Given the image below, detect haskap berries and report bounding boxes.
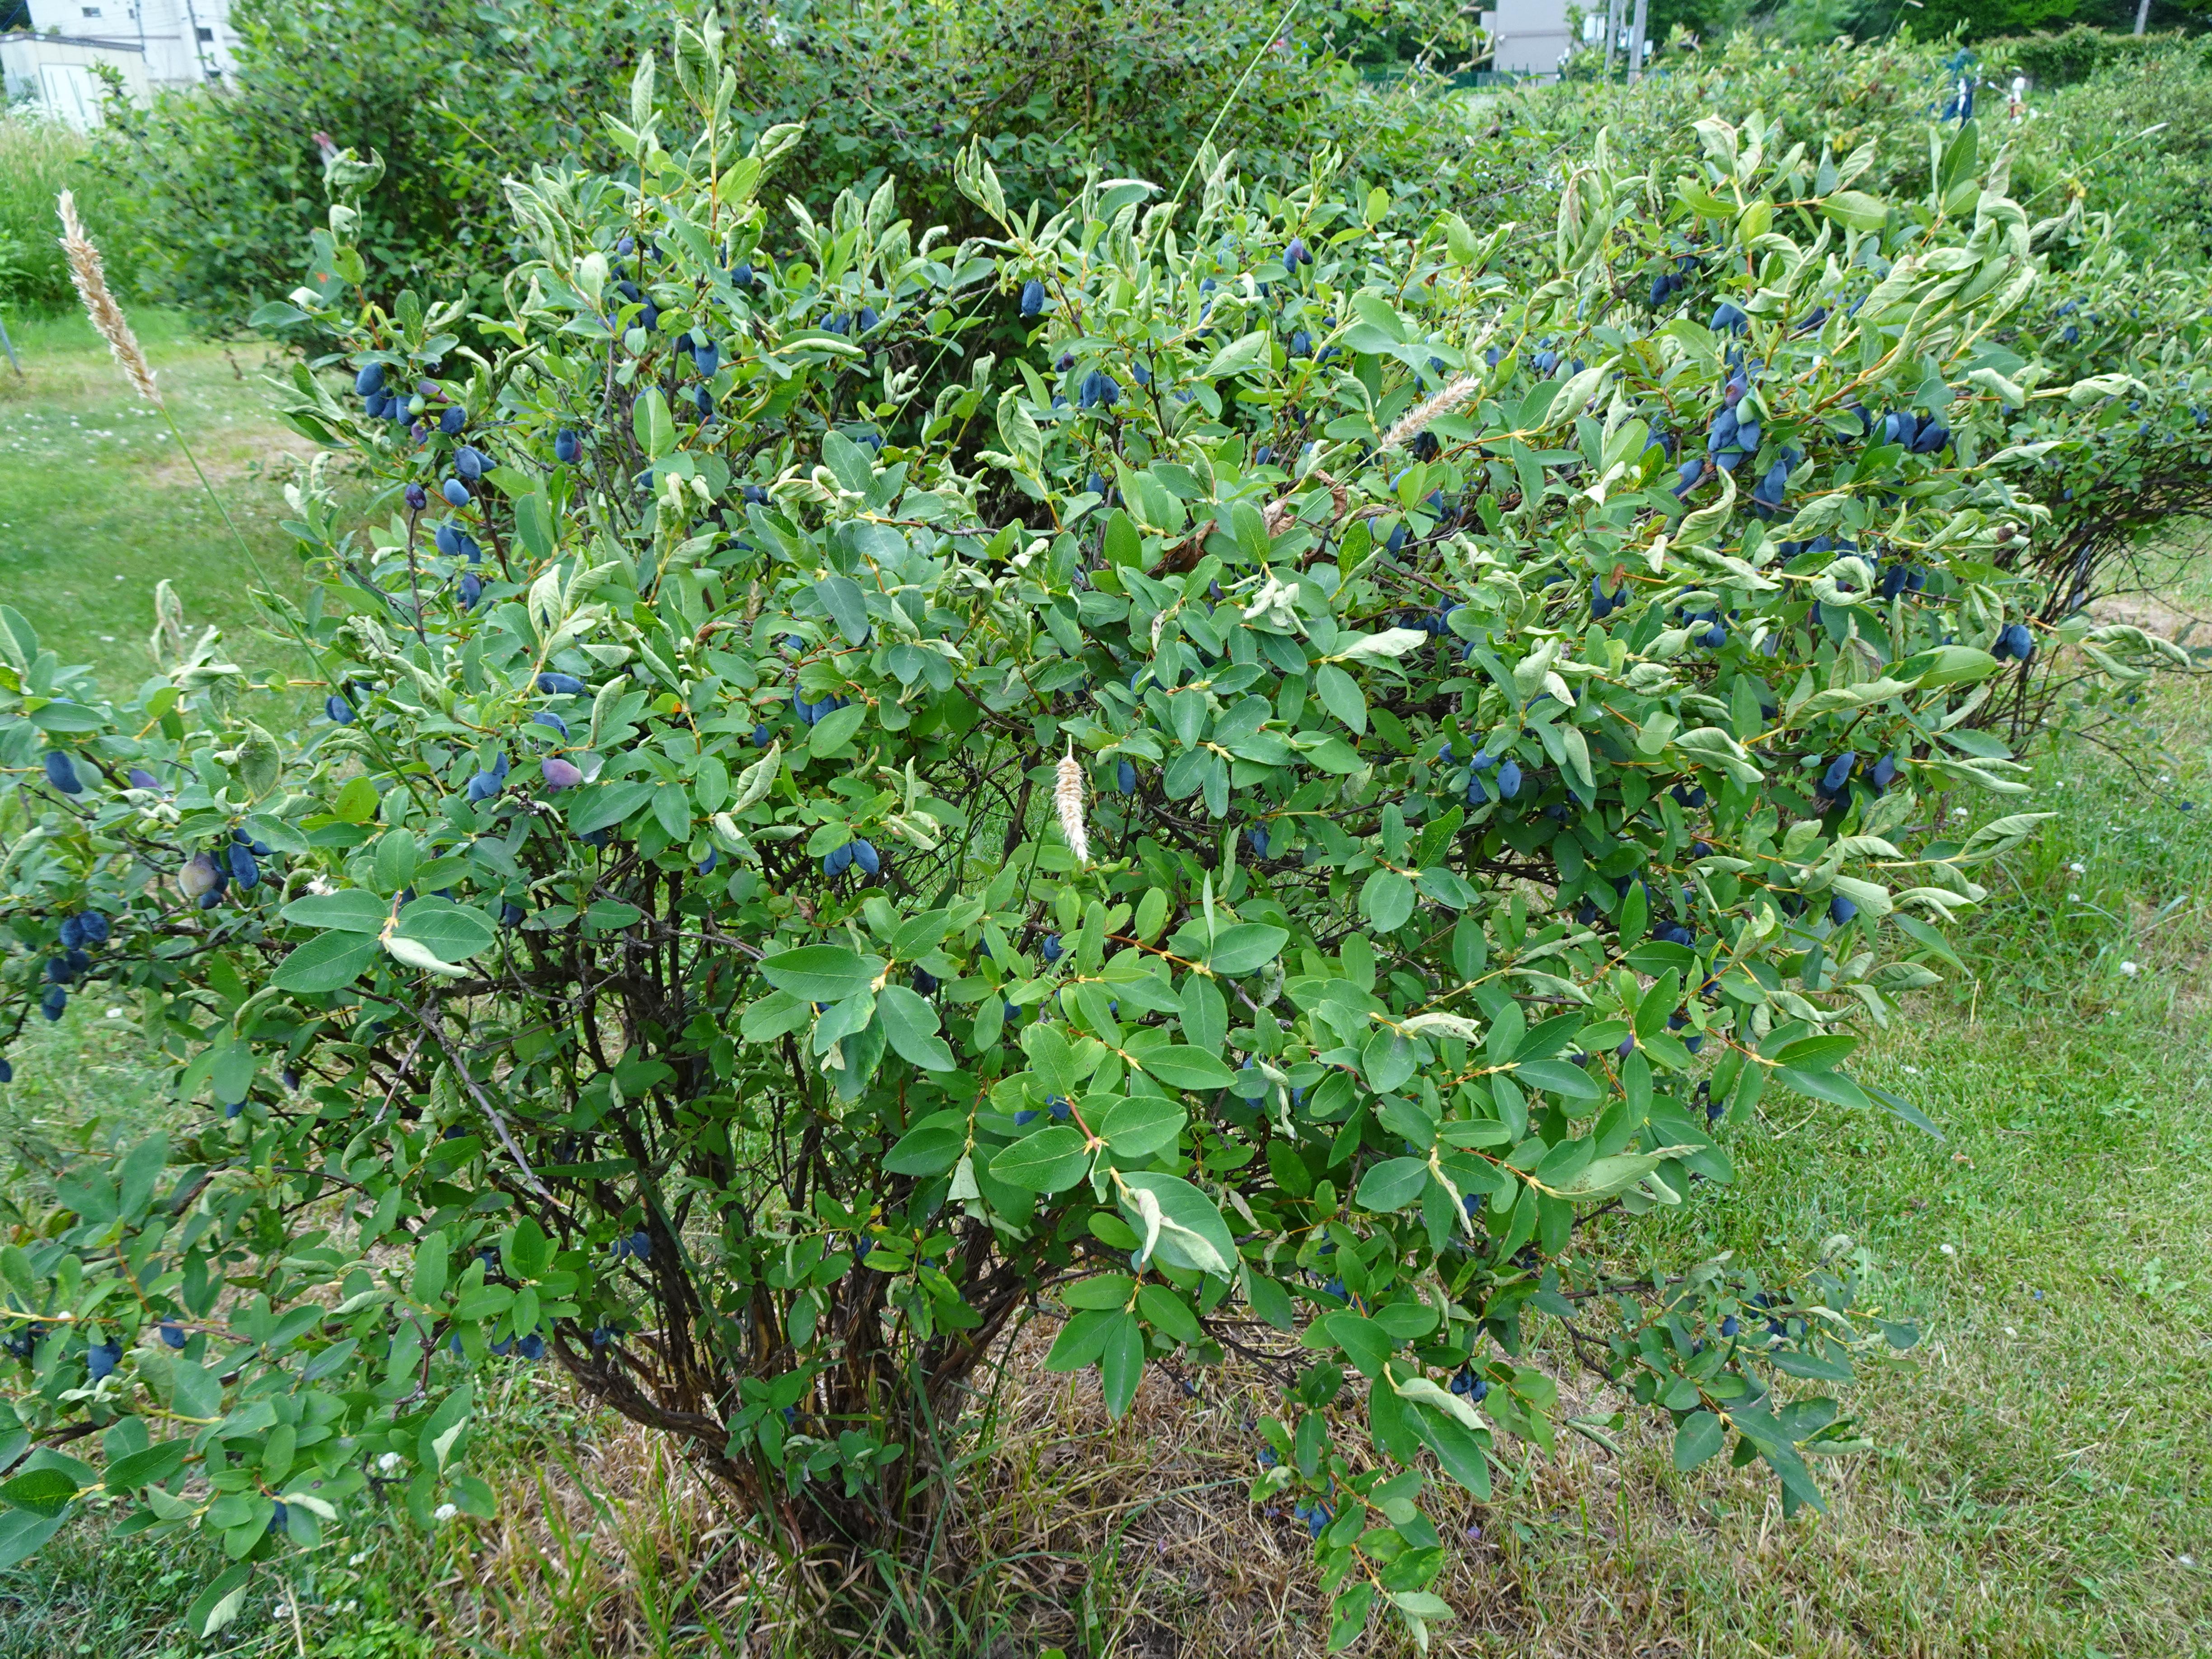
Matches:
[1293,328,1307,356]
[1063,351,1078,369]
[1411,618,1425,633]
[1289,237,1305,261]
[736,540,754,553]
[1318,1501,1336,1521]
[931,532,956,560]
[1761,703,1782,721]
[836,693,851,706]
[1447,504,1465,517]
[47,953,79,985]
[1767,1321,1785,1352]
[608,253,624,279]
[370,1020,387,1033]
[1462,641,1477,665]
[1679,255,1696,273]
[613,273,641,302]
[1720,1316,1739,1339]
[1405,1140,1419,1155]
[1430,356,1445,373]
[4,1329,29,1355]
[1706,301,1736,332]
[456,571,485,607]
[1685,1033,1704,1055]
[1783,893,1801,916]
[1881,412,1899,447]
[1765,631,1782,658]
[1371,256,1385,265]
[1725,608,1742,626]
[1706,622,1727,651]
[1739,413,1760,455]
[1532,349,1547,368]
[1686,785,1707,807]
[1260,1446,1279,1462]
[498,899,526,931]
[1497,761,1523,800]
[1650,272,1670,308]
[1780,446,1800,474]
[1240,1055,1265,1109]
[388,394,413,423]
[1300,248,1315,266]
[1650,921,1690,946]
[1801,1319,1808,1335]
[1572,356,1585,372]
[1437,600,1471,635]
[850,839,882,874]
[674,333,695,359]
[451,1332,466,1355]
[1398,614,1414,630]
[1451,1363,1471,1396]
[650,231,680,272]
[1466,778,1494,811]
[380,392,396,421]
[325,697,344,721]
[1730,301,1749,337]
[282,1182,293,1201]
[1672,461,1707,499]
[1045,1093,1071,1119]
[1054,987,1064,1001]
[592,1326,612,1346]
[832,312,852,333]
[1570,1051,1590,1070]
[1439,740,1467,766]
[1425,488,1444,524]
[728,259,753,284]
[1414,374,1426,392]
[418,380,452,403]
[1057,358,1067,372]
[1833,789,1852,807]
[1699,1081,1714,1092]
[70,750,106,796]
[444,1125,465,1139]
[866,433,879,451]
[833,841,855,866]
[821,311,836,331]
[271,1489,291,1520]
[1749,358,1764,383]
[779,637,804,665]
[555,1140,577,1162]
[911,965,940,996]
[1681,888,1695,904]
[1256,282,1265,294]
[694,847,719,878]
[28,1320,46,1338]
[1882,563,1909,602]
[1836,580,1846,591]
[492,1323,513,1357]
[1777,577,1795,597]
[742,484,762,500]
[1830,751,1855,778]
[1294,1504,1311,1520]
[1668,1012,1692,1030]
[1835,541,1860,557]
[1200,277,1218,294]
[855,1235,874,1260]
[355,361,384,397]
[2005,621,2032,660]
[403,483,427,511]
[536,670,586,695]
[1247,820,1262,846]
[1040,933,1064,963]
[247,1102,270,1131]
[639,470,656,487]
[355,680,374,692]
[1522,727,1533,741]
[466,445,498,470]
[1895,409,1917,447]
[1586,393,1598,409]
[1767,458,1787,503]
[858,307,880,335]
[1097,370,1120,406]
[1004,999,1023,1019]
[1542,350,1557,373]
[1310,1510,1326,1539]
[1304,331,1312,352]
[1708,411,1739,455]
[1735,396,1756,422]
[696,410,717,422]
[1727,342,1745,370]
[398,885,418,908]
[452,446,482,480]
[1707,1101,1726,1122]
[1217,248,1230,264]
[1114,757,1139,797]
[443,477,470,507]
[1415,431,1428,454]
[1701,966,1719,994]
[1130,1246,1153,1276]
[1914,420,1948,455]
[1368,515,1383,540]
[1639,881,1653,908]
[637,297,662,326]
[2180,801,2196,811]
[613,1239,633,1257]
[1052,392,1067,411]
[459,533,481,569]
[1316,346,1331,363]
[1323,316,1338,328]
[413,418,433,441]
[364,390,384,418]
[792,692,816,726]
[1613,879,1631,898]
[1775,538,1809,564]
[804,692,842,729]
[580,830,594,840]
[429,885,458,903]
[1320,1230,1333,1254]
[1132,356,1155,386]
[1461,1193,1482,1220]
[1095,745,1117,768]
[1725,376,1747,411]
[539,758,585,787]
[1470,1369,1486,1403]
[922,1257,936,1270]
[1571,685,1586,700]
[1849,295,1869,315]
[1087,473,1103,496]
[1669,783,1686,808]
[595,316,609,329]
[226,1098,249,1118]
[1669,272,1685,292]
[616,236,636,257]
[87,1342,112,1381]
[1472,751,1501,780]
[41,983,69,1021]
[1253,824,1271,859]
[1715,443,1747,473]
[515,1332,544,1359]
[628,1232,654,1259]
[227,840,263,893]
[198,866,233,912]
[1906,564,1928,594]
[1545,574,1563,588]
[1798,290,1845,328]
[591,827,611,849]
[1527,692,1549,710]
[1208,579,1225,599]
[1612,586,1633,609]
[1829,891,1858,927]
[823,851,845,877]
[1304,441,1313,456]
[1669,234,1684,246]
[1546,804,1563,818]
[1751,478,1774,519]
[1808,531,1845,557]
[1109,1000,1119,1011]
[1427,432,1441,454]
[179,852,216,896]
[1811,601,1826,627]
[467,775,488,803]
[105,1339,125,1363]
[1538,336,1553,347]
[690,329,711,349]
[125,766,161,793]
[59,914,89,957]
[1615,1035,1634,1055]
[757,488,776,505]
[554,424,576,460]
[1684,606,1714,629]
[1746,1295,1767,1320]
[1388,521,1414,550]
[1590,574,1611,621]
[1816,780,1834,801]
[158,1317,189,1346]
[783,1406,798,1426]
[1131,670,1152,698]
[1297,408,1308,426]
[1483,345,1506,373]
[481,1252,495,1272]
[1873,755,1899,786]
[1075,677,1091,703]
[1577,297,1589,320]
[408,392,426,417]
[1424,614,1439,635]
[439,405,467,436]
[436,525,465,559]
[1693,842,1715,859]
[1251,967,1262,979]
[1824,763,1849,792]
[1448,764,1474,793]
[77,910,110,948]
[333,695,356,725]
[1,1057,15,1084]
[1834,405,1868,443]
[1674,583,1700,614]
[285,1067,300,1090]
[1292,1087,1310,1109]
[1254,445,1273,466]
[1568,790,1579,801]
[1321,1478,1335,1498]
[1058,646,1073,661]
[567,432,583,465]
[1391,467,1412,490]
[1647,426,1675,463]
[230,828,285,857]
[1692,606,1719,646]
[2128,695,2138,704]
[695,337,722,380]
[1556,358,1575,382]
[1174,389,1189,403]
[536,1317,558,1334]
[1437,594,1458,613]
[1429,330,1445,345]
[741,724,770,749]
[1323,1276,1347,1299]
[694,384,716,412]
[610,314,632,338]
[1014,1107,1042,1125]
[488,750,508,772]
[534,712,566,739]
[1578,906,1595,925]
[477,769,502,798]
[227,1117,252,1144]
[41,745,84,795]
[1328,348,1342,370]
[1799,755,1823,768]
[1282,244,1297,277]
[1807,903,1828,930]
[1197,299,1220,339]
[1081,368,1104,407]
[653,292,679,307]
[1019,275,1047,320]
